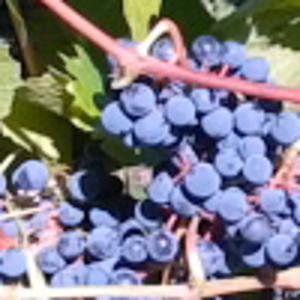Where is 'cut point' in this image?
<instances>
[{
  "instance_id": "cut-point-1",
  "label": "cut point",
  "mask_w": 300,
  "mask_h": 300,
  "mask_svg": "<svg viewBox=\"0 0 300 300\" xmlns=\"http://www.w3.org/2000/svg\"><path fill=\"white\" fill-rule=\"evenodd\" d=\"M170 36L175 49V58L178 61H187L190 53L186 50L181 31L175 21L168 16H160L154 27L147 33L142 41H136L133 44V50L142 57H149L152 54L151 47L161 36Z\"/></svg>"
}]
</instances>
